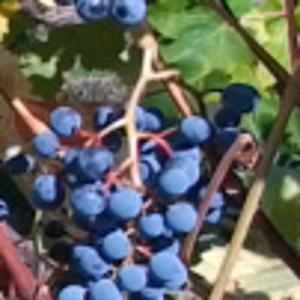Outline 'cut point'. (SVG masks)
Wrapping results in <instances>:
<instances>
[{"mask_svg": "<svg viewBox=\"0 0 300 300\" xmlns=\"http://www.w3.org/2000/svg\"><path fill=\"white\" fill-rule=\"evenodd\" d=\"M151 66L152 62L147 56V50L144 49L141 61L139 63V82L136 88L134 89L133 94L126 100L124 115L119 116L118 118L112 121H109L102 127V130H104L107 133V135H109L112 131L122 126H125L128 145L129 165L131 167V173L133 175L136 172L140 171L138 162L136 131L133 121V112L135 109V105L141 100L143 93L148 87V78Z\"/></svg>", "mask_w": 300, "mask_h": 300, "instance_id": "1", "label": "cut point"}]
</instances>
